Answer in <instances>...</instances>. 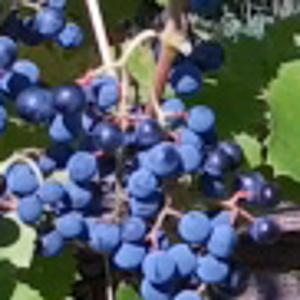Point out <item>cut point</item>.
<instances>
[{"label": "cut point", "mask_w": 300, "mask_h": 300, "mask_svg": "<svg viewBox=\"0 0 300 300\" xmlns=\"http://www.w3.org/2000/svg\"><path fill=\"white\" fill-rule=\"evenodd\" d=\"M147 36H154L164 38V31L157 29H145L137 34L124 48L120 60H114L112 65L120 67L121 83L126 85L128 83L127 62L132 49Z\"/></svg>", "instance_id": "obj_1"}]
</instances>
